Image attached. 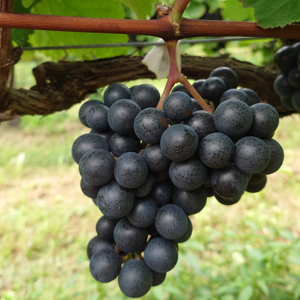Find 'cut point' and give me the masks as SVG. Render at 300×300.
<instances>
[{
    "label": "cut point",
    "instance_id": "obj_1",
    "mask_svg": "<svg viewBox=\"0 0 300 300\" xmlns=\"http://www.w3.org/2000/svg\"><path fill=\"white\" fill-rule=\"evenodd\" d=\"M165 41L166 48L169 54V76L167 83L162 91L159 104L156 108L163 110V102L165 98L172 91L173 86L176 84L179 77V70L177 67V43L182 37H160Z\"/></svg>",
    "mask_w": 300,
    "mask_h": 300
}]
</instances>
